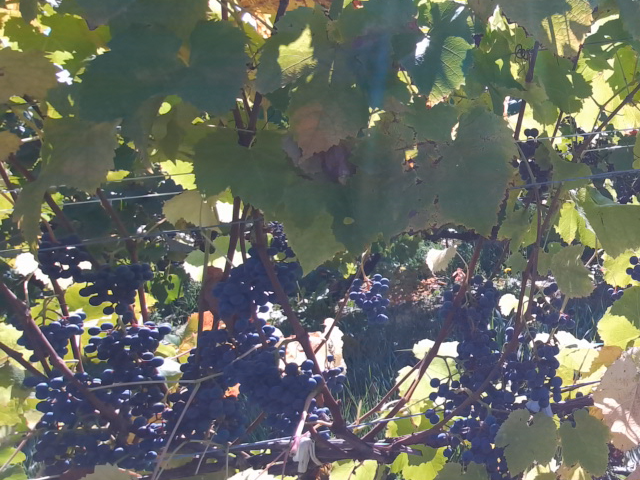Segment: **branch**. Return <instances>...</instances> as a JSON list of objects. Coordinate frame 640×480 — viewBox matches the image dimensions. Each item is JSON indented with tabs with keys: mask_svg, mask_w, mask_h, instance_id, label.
Instances as JSON below:
<instances>
[{
	"mask_svg": "<svg viewBox=\"0 0 640 480\" xmlns=\"http://www.w3.org/2000/svg\"><path fill=\"white\" fill-rule=\"evenodd\" d=\"M0 292L13 304L16 314L19 317L20 324L29 336L31 345L34 347L37 360L43 371L46 374L51 372V368L44 358V352L55 367L56 371L71 384H74L84 399L88 401L99 414L121 428L131 430L133 428V423L130 420L106 407L94 392L88 388L84 380L64 365L55 349L47 340L43 327L33 318V315L28 309L25 301L19 295H16L12 290H10L8 284L4 280H0Z\"/></svg>",
	"mask_w": 640,
	"mask_h": 480,
	"instance_id": "branch-2",
	"label": "branch"
},
{
	"mask_svg": "<svg viewBox=\"0 0 640 480\" xmlns=\"http://www.w3.org/2000/svg\"><path fill=\"white\" fill-rule=\"evenodd\" d=\"M94 193L96 197L99 198L100 201L102 202L104 209L109 214V217L111 218L116 228L119 230V233L121 234V236L131 235V233L127 231L124 225L121 223L115 210L112 208L110 202L107 200V197L102 193V191L99 188H96L94 190Z\"/></svg>",
	"mask_w": 640,
	"mask_h": 480,
	"instance_id": "branch-6",
	"label": "branch"
},
{
	"mask_svg": "<svg viewBox=\"0 0 640 480\" xmlns=\"http://www.w3.org/2000/svg\"><path fill=\"white\" fill-rule=\"evenodd\" d=\"M640 89V85L636 84L633 88H631L622 100L616 105L615 109L611 112L609 116H607L602 123L596 128V130H603L605 126L616 116V114L620 111V109L625 105L628 99L633 95L637 90Z\"/></svg>",
	"mask_w": 640,
	"mask_h": 480,
	"instance_id": "branch-9",
	"label": "branch"
},
{
	"mask_svg": "<svg viewBox=\"0 0 640 480\" xmlns=\"http://www.w3.org/2000/svg\"><path fill=\"white\" fill-rule=\"evenodd\" d=\"M252 223L255 232V244L256 251L258 253L260 264L266 274L268 279L269 287L271 289L272 299L276 302L277 306L283 312L286 321L288 322L290 328L292 329L294 335L299 339L302 346V351L308 360H311L313 366L310 368V373L312 375H318L320 373L319 363L316 361V355L321 349L325 342V340L331 335L332 330L334 329L337 322L342 317L345 308L347 307L350 301V293L351 290L347 289L345 293V298L340 306L336 316L332 319L329 324L325 334H323L317 344V346L313 349V342L309 338L308 334L304 332L301 325L299 324L297 317L294 315L292 308L290 307V303L287 299L285 292L280 288L278 283L277 275L269 260V256L267 253V249L265 247L264 240V228L261 219V212L258 209H253L251 211Z\"/></svg>",
	"mask_w": 640,
	"mask_h": 480,
	"instance_id": "branch-3",
	"label": "branch"
},
{
	"mask_svg": "<svg viewBox=\"0 0 640 480\" xmlns=\"http://www.w3.org/2000/svg\"><path fill=\"white\" fill-rule=\"evenodd\" d=\"M261 100H262V96L260 94H257L254 98V102L252 105V111H251V119H250V124L248 127V130L250 132H253L256 127H257V121H258V113H259V107L261 104Z\"/></svg>",
	"mask_w": 640,
	"mask_h": 480,
	"instance_id": "branch-14",
	"label": "branch"
},
{
	"mask_svg": "<svg viewBox=\"0 0 640 480\" xmlns=\"http://www.w3.org/2000/svg\"><path fill=\"white\" fill-rule=\"evenodd\" d=\"M145 288L146 285L144 283H140L138 285V290H137V295H138V300H139V307H140V311H141V319L143 321H146L148 319V309H147V305H146V298H145Z\"/></svg>",
	"mask_w": 640,
	"mask_h": 480,
	"instance_id": "branch-15",
	"label": "branch"
},
{
	"mask_svg": "<svg viewBox=\"0 0 640 480\" xmlns=\"http://www.w3.org/2000/svg\"><path fill=\"white\" fill-rule=\"evenodd\" d=\"M534 189V197H535V203H536V213H537V230H536V234H537V239L535 241L534 247H533V254L529 255V264L527 266V269L525 271L524 274V278L522 281V285L520 288V292H519V297H518V304H517V309H516V315H515V328L513 329V335L511 336V339L509 341V344L507 345L506 349L504 350V352L502 353V355L500 356V358L498 359V361L496 362V364L494 365V367L489 371V373L482 379L481 384L477 387V389H475L472 392V395H469L468 397H466L464 400H462L461 402H459L451 411L450 413L445 416L444 418L440 419L439 421H437L434 425L427 427L426 429H423L413 435H410L407 438H404L402 440H400L399 442L393 444L391 446V449L393 451H398L401 448L405 447L406 445L412 444L413 442L424 438L425 436H428L434 432H436L437 430H439L441 427H443L444 425H446L447 423H450L455 416L458 414V412L463 409L464 407L468 406L471 402L474 401V397H478L488 386L489 382L496 376V374L498 373V371L502 368L503 364L506 362V360L508 359V357L510 356V354L512 353V351L514 350V347L516 346L518 339L520 337V332L523 329V327L526 325V323L529 321L532 309H533V303H534V297H535V281H536V275H537V256H538V249L540 247V243L542 241V236H543V232L545 231V227L547 225V221L550 218L552 212L554 211L557 201H558V197L560 195V190L556 189L552 198V202L551 205L549 206V209L547 210L545 216L542 219V211H541V201H540V195H539V187H535ZM531 273V279H530V293H529V301H528V307L526 310V313L524 315V318H522L520 320L521 317V311H522V306H523V299H524V294H525V290L527 287V283L529 280V276Z\"/></svg>",
	"mask_w": 640,
	"mask_h": 480,
	"instance_id": "branch-1",
	"label": "branch"
},
{
	"mask_svg": "<svg viewBox=\"0 0 640 480\" xmlns=\"http://www.w3.org/2000/svg\"><path fill=\"white\" fill-rule=\"evenodd\" d=\"M515 147L517 148L518 154L521 157L522 161L524 162V166L529 174L530 180L534 181L535 180L534 172L529 164V160L526 157V154L523 152L521 144H515Z\"/></svg>",
	"mask_w": 640,
	"mask_h": 480,
	"instance_id": "branch-18",
	"label": "branch"
},
{
	"mask_svg": "<svg viewBox=\"0 0 640 480\" xmlns=\"http://www.w3.org/2000/svg\"><path fill=\"white\" fill-rule=\"evenodd\" d=\"M369 254H370V249H369V248H366V249H365V251H364V255H363V257H362L361 261L359 262V265H358L357 270H356V272H355V276H356V277H359V276H360V274H361L360 267H364L365 263H366V262H367V260H368Z\"/></svg>",
	"mask_w": 640,
	"mask_h": 480,
	"instance_id": "branch-22",
	"label": "branch"
},
{
	"mask_svg": "<svg viewBox=\"0 0 640 480\" xmlns=\"http://www.w3.org/2000/svg\"><path fill=\"white\" fill-rule=\"evenodd\" d=\"M528 107V103L526 101H523L520 104L518 113H517V119H516V123H515V127L513 130V139H520V132L522 129V125H523V121H524V116H525V112L526 109Z\"/></svg>",
	"mask_w": 640,
	"mask_h": 480,
	"instance_id": "branch-12",
	"label": "branch"
},
{
	"mask_svg": "<svg viewBox=\"0 0 640 480\" xmlns=\"http://www.w3.org/2000/svg\"><path fill=\"white\" fill-rule=\"evenodd\" d=\"M595 139H596V135H594V136H590L589 138H587V139L584 141V143H582V144L580 145V147L578 148V150L576 151V153H575V154H574V156H573V159H572V163H573V164H576V163H577L578 158H579V157H580V155L583 153V150H584V149H585V148H586L590 143H592V142H593V140H595Z\"/></svg>",
	"mask_w": 640,
	"mask_h": 480,
	"instance_id": "branch-20",
	"label": "branch"
},
{
	"mask_svg": "<svg viewBox=\"0 0 640 480\" xmlns=\"http://www.w3.org/2000/svg\"><path fill=\"white\" fill-rule=\"evenodd\" d=\"M0 349L4 353H7L17 364H19L29 373L37 376L39 379H43L45 377V374L41 370L33 367L26 360H23L12 348L7 346L5 343L0 344Z\"/></svg>",
	"mask_w": 640,
	"mask_h": 480,
	"instance_id": "branch-7",
	"label": "branch"
},
{
	"mask_svg": "<svg viewBox=\"0 0 640 480\" xmlns=\"http://www.w3.org/2000/svg\"><path fill=\"white\" fill-rule=\"evenodd\" d=\"M387 426H388L387 422L383 424L375 425L364 437V440L366 442H370L377 432H379L382 428H386Z\"/></svg>",
	"mask_w": 640,
	"mask_h": 480,
	"instance_id": "branch-21",
	"label": "branch"
},
{
	"mask_svg": "<svg viewBox=\"0 0 640 480\" xmlns=\"http://www.w3.org/2000/svg\"><path fill=\"white\" fill-rule=\"evenodd\" d=\"M124 244L127 247V252L130 257L131 263L133 265H136L138 263V258L136 254V242L134 240H127V241H124Z\"/></svg>",
	"mask_w": 640,
	"mask_h": 480,
	"instance_id": "branch-19",
	"label": "branch"
},
{
	"mask_svg": "<svg viewBox=\"0 0 640 480\" xmlns=\"http://www.w3.org/2000/svg\"><path fill=\"white\" fill-rule=\"evenodd\" d=\"M539 48H540V43L538 41H535L532 45L531 55H530L529 63L527 66V71L525 73V80L527 82H530L532 80V76L534 73V69H535V65H536L537 57L539 53Z\"/></svg>",
	"mask_w": 640,
	"mask_h": 480,
	"instance_id": "branch-11",
	"label": "branch"
},
{
	"mask_svg": "<svg viewBox=\"0 0 640 480\" xmlns=\"http://www.w3.org/2000/svg\"><path fill=\"white\" fill-rule=\"evenodd\" d=\"M51 285L55 293L58 294L60 313L63 317H66L68 315V310H67L66 297L64 295V292L62 291V288L56 279H53L51 281Z\"/></svg>",
	"mask_w": 640,
	"mask_h": 480,
	"instance_id": "branch-13",
	"label": "branch"
},
{
	"mask_svg": "<svg viewBox=\"0 0 640 480\" xmlns=\"http://www.w3.org/2000/svg\"><path fill=\"white\" fill-rule=\"evenodd\" d=\"M0 175L3 177L4 183L6 185V187L12 191L10 193L11 199L13 201H16L18 199V194L13 191L15 189L14 184L11 181L10 175L8 174V172L6 171V169L4 168V166L2 164H0Z\"/></svg>",
	"mask_w": 640,
	"mask_h": 480,
	"instance_id": "branch-17",
	"label": "branch"
},
{
	"mask_svg": "<svg viewBox=\"0 0 640 480\" xmlns=\"http://www.w3.org/2000/svg\"><path fill=\"white\" fill-rule=\"evenodd\" d=\"M238 238V226L237 225H232L231 226V236L229 239V243H228V248L226 251V257L229 261H232L234 259V250H235V246H236V241Z\"/></svg>",
	"mask_w": 640,
	"mask_h": 480,
	"instance_id": "branch-16",
	"label": "branch"
},
{
	"mask_svg": "<svg viewBox=\"0 0 640 480\" xmlns=\"http://www.w3.org/2000/svg\"><path fill=\"white\" fill-rule=\"evenodd\" d=\"M233 116L236 127L240 130L238 132V135L240 136L241 143L244 146H248L253 139V135L251 133L246 134V132L242 130L244 128V124L242 122L240 110L238 108H235L233 110Z\"/></svg>",
	"mask_w": 640,
	"mask_h": 480,
	"instance_id": "branch-10",
	"label": "branch"
},
{
	"mask_svg": "<svg viewBox=\"0 0 640 480\" xmlns=\"http://www.w3.org/2000/svg\"><path fill=\"white\" fill-rule=\"evenodd\" d=\"M318 390L320 392V396L326 401L330 408L333 426L335 428H340L342 426V415L337 399L331 394L325 383H320L318 385Z\"/></svg>",
	"mask_w": 640,
	"mask_h": 480,
	"instance_id": "branch-5",
	"label": "branch"
},
{
	"mask_svg": "<svg viewBox=\"0 0 640 480\" xmlns=\"http://www.w3.org/2000/svg\"><path fill=\"white\" fill-rule=\"evenodd\" d=\"M42 197L50 205L51 211L60 219L63 229L66 231L67 235L69 237H72L74 235V231L70 227V224L65 214L62 211H60V209L58 208L57 203L54 201L53 197L47 191H44L42 193Z\"/></svg>",
	"mask_w": 640,
	"mask_h": 480,
	"instance_id": "branch-8",
	"label": "branch"
},
{
	"mask_svg": "<svg viewBox=\"0 0 640 480\" xmlns=\"http://www.w3.org/2000/svg\"><path fill=\"white\" fill-rule=\"evenodd\" d=\"M485 242H486V238L484 236H481L479 238V240H478L476 248L474 249V251H473V253L471 255L467 271H466V273H465V275H464V277L462 279V282H461V286H460V289H459V292H458V295H457L456 302H455L453 308L451 309V312L449 313V316L444 321L443 325L441 326V328L439 330V333H438L437 337L433 341L432 348L429 350V352L425 356L422 364L420 365V367L417 369L416 373L412 377L407 392L397 401V403L388 412V416L389 417L395 416L397 414V412L402 408V406L407 402V400H409L413 396V394H414V392L416 390V387L418 385V381L420 380L421 376L423 375V373L425 372V370L429 366V364H430L431 360L433 359V357L438 352L439 345L444 340V338L446 336V333H447V330L449 329L450 325L453 323V321L455 320L459 310L461 309V306L463 304V301H464V298H465V294H466V291H467V286H468L469 281H470V279H471V277H472V275L474 273L478 257H479L481 251L483 250V248L485 246Z\"/></svg>",
	"mask_w": 640,
	"mask_h": 480,
	"instance_id": "branch-4",
	"label": "branch"
}]
</instances>
